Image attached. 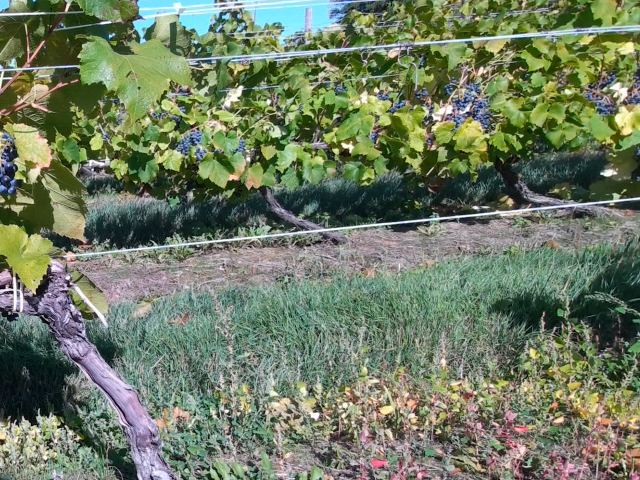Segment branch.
Segmentation results:
<instances>
[{
	"instance_id": "branch-1",
	"label": "branch",
	"mask_w": 640,
	"mask_h": 480,
	"mask_svg": "<svg viewBox=\"0 0 640 480\" xmlns=\"http://www.w3.org/2000/svg\"><path fill=\"white\" fill-rule=\"evenodd\" d=\"M80 80L79 79H72V80H67L66 82H63L61 84H58L56 86H53L47 90L42 91L39 95H37L33 100L29 101V102H24L22 104H19L17 106H14L10 109H8L6 112L2 113L0 115V121H2L3 119L7 118L9 115L27 108V107H31L34 106L35 104H37L43 97L55 92V91H59L60 89L66 88L70 85H74V84H79Z\"/></svg>"
},
{
	"instance_id": "branch-2",
	"label": "branch",
	"mask_w": 640,
	"mask_h": 480,
	"mask_svg": "<svg viewBox=\"0 0 640 480\" xmlns=\"http://www.w3.org/2000/svg\"><path fill=\"white\" fill-rule=\"evenodd\" d=\"M64 18H65V15L57 17V19L55 20L53 25L48 29V31L43 36L41 42L34 49L32 55L24 62L23 67H28L32 63V61L35 60V58L38 56V54L41 51V49L45 46V44H46L47 40L49 39V37L57 29V27L60 25V23L62 22V20Z\"/></svg>"
}]
</instances>
